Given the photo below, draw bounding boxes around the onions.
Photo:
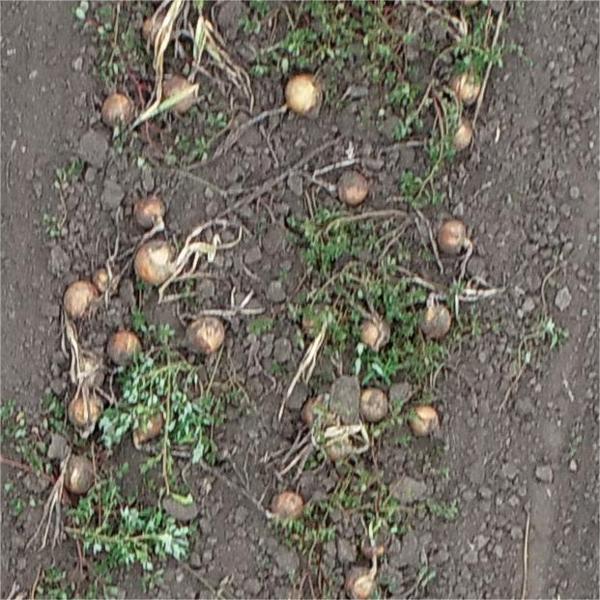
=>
[105,329,140,365]
[450,121,473,150]
[356,317,388,348]
[437,218,468,254]
[157,77,197,114]
[300,396,328,426]
[304,304,339,340]
[61,453,95,491]
[451,75,481,103]
[337,173,368,205]
[64,392,101,425]
[185,316,225,353]
[270,488,301,519]
[97,91,132,126]
[71,359,103,387]
[417,299,450,336]
[358,388,389,421]
[141,13,170,42]
[322,433,352,463]
[93,266,113,291]
[133,238,175,283]
[363,531,386,558]
[62,281,98,319]
[347,569,377,598]
[132,195,163,225]
[406,403,436,434]
[135,413,164,442]
[282,73,317,113]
